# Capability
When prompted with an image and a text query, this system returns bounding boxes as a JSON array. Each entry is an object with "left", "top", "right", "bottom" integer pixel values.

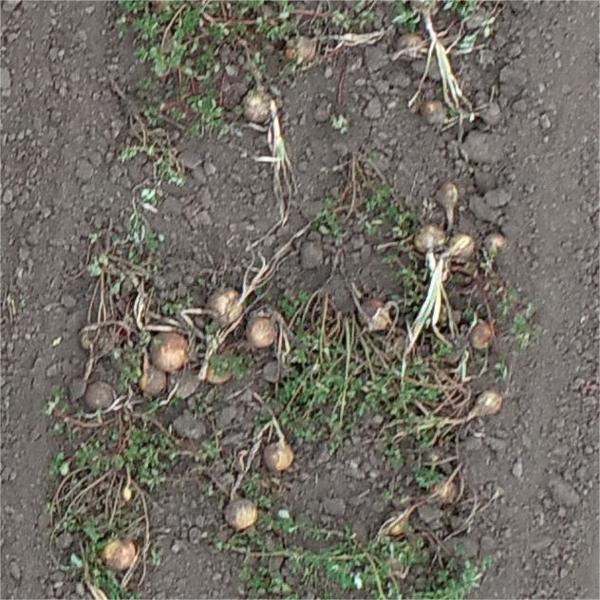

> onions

[
  {"left": 245, "top": 315, "right": 276, "bottom": 346},
  {"left": 482, "top": 102, "right": 501, "bottom": 123},
  {"left": 487, "top": 231, "right": 508, "bottom": 254},
  {"left": 209, "top": 285, "right": 239, "bottom": 319},
  {"left": 138, "top": 367, "right": 168, "bottom": 396},
  {"left": 397, "top": 31, "right": 429, "bottom": 61},
  {"left": 437, "top": 182, "right": 462, "bottom": 209},
  {"left": 204, "top": 356, "right": 234, "bottom": 383},
  {"left": 286, "top": 35, "right": 314, "bottom": 63},
  {"left": 240, "top": 91, "right": 269, "bottom": 122},
  {"left": 417, "top": 95, "right": 442, "bottom": 122},
  {"left": 81, "top": 326, "right": 105, "bottom": 352},
  {"left": 431, "top": 476, "right": 455, "bottom": 504},
  {"left": 413, "top": 223, "right": 443, "bottom": 252},
  {"left": 99, "top": 536, "right": 136, "bottom": 572},
  {"left": 262, "top": 441, "right": 294, "bottom": 472},
  {"left": 358, "top": 297, "right": 387, "bottom": 326},
  {"left": 407, "top": 0, "right": 439, "bottom": 12},
  {"left": 475, "top": 388, "right": 503, "bottom": 415},
  {"left": 84, "top": 379, "right": 115, "bottom": 411},
  {"left": 223, "top": 496, "right": 258, "bottom": 530},
  {"left": 467, "top": 323, "right": 495, "bottom": 350},
  {"left": 448, "top": 233, "right": 474, "bottom": 258},
  {"left": 382, "top": 511, "right": 408, "bottom": 538},
  {"left": 151, "top": 333, "right": 187, "bottom": 370}
]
